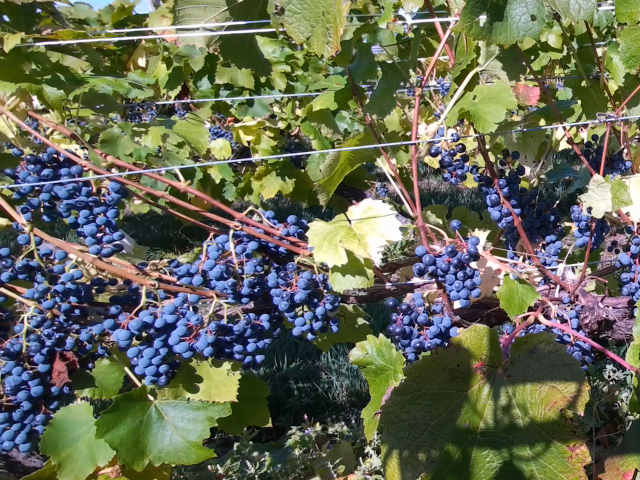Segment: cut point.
Returning a JSON list of instances; mask_svg holds the SVG:
<instances>
[{
  "label": "cut point",
  "mask_w": 640,
  "mask_h": 480,
  "mask_svg": "<svg viewBox=\"0 0 640 480\" xmlns=\"http://www.w3.org/2000/svg\"><path fill=\"white\" fill-rule=\"evenodd\" d=\"M146 288L145 286L141 285V302H139L135 307H134V311L138 312L139 309H141L146 303L150 304V305H156L157 301L147 298L146 296Z\"/></svg>",
  "instance_id": "cut-point-1"
},
{
  "label": "cut point",
  "mask_w": 640,
  "mask_h": 480,
  "mask_svg": "<svg viewBox=\"0 0 640 480\" xmlns=\"http://www.w3.org/2000/svg\"><path fill=\"white\" fill-rule=\"evenodd\" d=\"M29 240L31 244H28L23 250H22V254L26 255L30 250H32L33 252V257L35 259L39 258V254H38V249L36 247V241L34 238V235H32L31 233H29Z\"/></svg>",
  "instance_id": "cut-point-2"
},
{
  "label": "cut point",
  "mask_w": 640,
  "mask_h": 480,
  "mask_svg": "<svg viewBox=\"0 0 640 480\" xmlns=\"http://www.w3.org/2000/svg\"><path fill=\"white\" fill-rule=\"evenodd\" d=\"M218 304H220V306L224 309L228 308V305L218 296V297H214V300L211 303V307L209 308L208 313L213 314Z\"/></svg>",
  "instance_id": "cut-point-3"
},
{
  "label": "cut point",
  "mask_w": 640,
  "mask_h": 480,
  "mask_svg": "<svg viewBox=\"0 0 640 480\" xmlns=\"http://www.w3.org/2000/svg\"><path fill=\"white\" fill-rule=\"evenodd\" d=\"M234 229L235 228L232 227V226H229V228H228V241L230 243V246H229V252L230 253H234L235 252V241H234V238H233Z\"/></svg>",
  "instance_id": "cut-point-4"
},
{
  "label": "cut point",
  "mask_w": 640,
  "mask_h": 480,
  "mask_svg": "<svg viewBox=\"0 0 640 480\" xmlns=\"http://www.w3.org/2000/svg\"><path fill=\"white\" fill-rule=\"evenodd\" d=\"M215 233H213L212 231L209 233V235L204 239V242L201 245V252L205 253L206 252V247L209 244V242L214 238Z\"/></svg>",
  "instance_id": "cut-point-5"
},
{
  "label": "cut point",
  "mask_w": 640,
  "mask_h": 480,
  "mask_svg": "<svg viewBox=\"0 0 640 480\" xmlns=\"http://www.w3.org/2000/svg\"><path fill=\"white\" fill-rule=\"evenodd\" d=\"M249 212L258 213V212H259V209H258V208H256V207H254V206H248L247 208H245V209L242 211V213H241V214H243L244 216H246V215H247V213H249Z\"/></svg>",
  "instance_id": "cut-point-6"
},
{
  "label": "cut point",
  "mask_w": 640,
  "mask_h": 480,
  "mask_svg": "<svg viewBox=\"0 0 640 480\" xmlns=\"http://www.w3.org/2000/svg\"><path fill=\"white\" fill-rule=\"evenodd\" d=\"M424 226H430L432 229H436L440 234L447 235L446 231L441 230V228H439L438 226H435L433 224L424 223Z\"/></svg>",
  "instance_id": "cut-point-7"
}]
</instances>
